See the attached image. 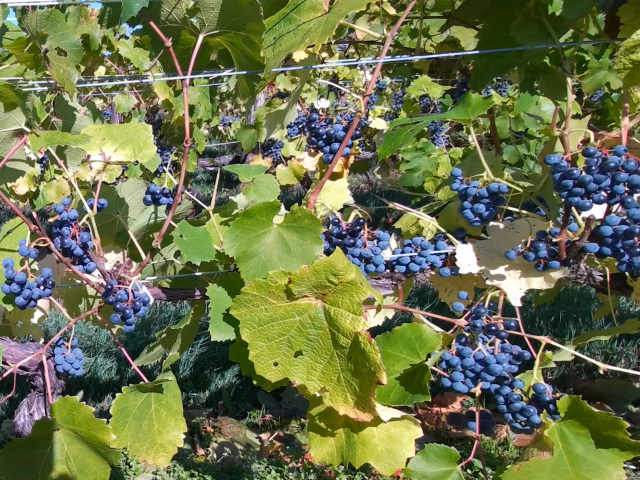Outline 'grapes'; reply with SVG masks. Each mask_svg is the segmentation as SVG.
<instances>
[{
	"mask_svg": "<svg viewBox=\"0 0 640 480\" xmlns=\"http://www.w3.org/2000/svg\"><path fill=\"white\" fill-rule=\"evenodd\" d=\"M479 433L489 438L495 436V431L492 429L495 426V421L491 413L481 411L479 413Z\"/></svg>",
	"mask_w": 640,
	"mask_h": 480,
	"instance_id": "dcf779d0",
	"label": "grapes"
},
{
	"mask_svg": "<svg viewBox=\"0 0 640 480\" xmlns=\"http://www.w3.org/2000/svg\"><path fill=\"white\" fill-rule=\"evenodd\" d=\"M71 204L72 200L69 197H64L59 201V204L53 206L54 211L60 214V218H56L49 225V230L53 233V245L58 251L64 249L68 257L79 258L74 266L81 273L91 275L97 270V264L87 256L86 250H92L94 243L91 241L88 227H84L79 233L78 240L80 243H76L74 239H71L70 234L73 226L78 224L77 217L79 216L77 208H70L65 211L66 205L70 206Z\"/></svg>",
	"mask_w": 640,
	"mask_h": 480,
	"instance_id": "f8a65327",
	"label": "grapes"
},
{
	"mask_svg": "<svg viewBox=\"0 0 640 480\" xmlns=\"http://www.w3.org/2000/svg\"><path fill=\"white\" fill-rule=\"evenodd\" d=\"M449 422L454 425H466L472 432L477 430V417L474 410L467 411L465 414L453 412L449 415Z\"/></svg>",
	"mask_w": 640,
	"mask_h": 480,
	"instance_id": "91a60905",
	"label": "grapes"
},
{
	"mask_svg": "<svg viewBox=\"0 0 640 480\" xmlns=\"http://www.w3.org/2000/svg\"><path fill=\"white\" fill-rule=\"evenodd\" d=\"M449 174L454 178L450 189L459 194L458 200L463 203L458 208L463 219L472 228L489 225L499 213L497 206L507 202V197L502 194H508L510 187L505 183H491L487 189H480L478 181L464 183L463 170L459 167L452 168Z\"/></svg>",
	"mask_w": 640,
	"mask_h": 480,
	"instance_id": "84f90ec7",
	"label": "grapes"
},
{
	"mask_svg": "<svg viewBox=\"0 0 640 480\" xmlns=\"http://www.w3.org/2000/svg\"><path fill=\"white\" fill-rule=\"evenodd\" d=\"M366 224L364 217L357 218L352 224L341 223L335 213L331 215L328 212L323 214V228L328 230L322 232L324 254L331 256L337 248L344 251L346 256L355 267H359L365 277L370 274H381L388 269V263L383 258L382 250L389 248L390 233L388 231L378 230L374 233V238L367 242L361 239L364 233L361 231Z\"/></svg>",
	"mask_w": 640,
	"mask_h": 480,
	"instance_id": "0513c4c2",
	"label": "grapes"
},
{
	"mask_svg": "<svg viewBox=\"0 0 640 480\" xmlns=\"http://www.w3.org/2000/svg\"><path fill=\"white\" fill-rule=\"evenodd\" d=\"M549 234L552 237L561 236L560 227H551ZM547 231L538 230L535 233L536 239L530 242V251H523V258L527 263H535L534 269L537 272H548L550 269L559 270L562 267V262L556 258L559 255V249L550 246H558V241H553L549 238Z\"/></svg>",
	"mask_w": 640,
	"mask_h": 480,
	"instance_id": "ef6de9ee",
	"label": "grapes"
},
{
	"mask_svg": "<svg viewBox=\"0 0 640 480\" xmlns=\"http://www.w3.org/2000/svg\"><path fill=\"white\" fill-rule=\"evenodd\" d=\"M4 269V277L10 283L1 285V292L4 295L15 294L14 303L19 310H25L27 307L33 308L39 304L42 297H50L53 293L55 280L51 278L53 270L50 267H43L40 274H37L34 281L28 280L26 273H17L14 268V258L7 256L1 261Z\"/></svg>",
	"mask_w": 640,
	"mask_h": 480,
	"instance_id": "83cd7487",
	"label": "grapes"
},
{
	"mask_svg": "<svg viewBox=\"0 0 640 480\" xmlns=\"http://www.w3.org/2000/svg\"><path fill=\"white\" fill-rule=\"evenodd\" d=\"M178 184H175L171 190L169 187H163L161 184H149L143 193V204L145 206L160 207L172 205L176 197Z\"/></svg>",
	"mask_w": 640,
	"mask_h": 480,
	"instance_id": "54f908b8",
	"label": "grapes"
},
{
	"mask_svg": "<svg viewBox=\"0 0 640 480\" xmlns=\"http://www.w3.org/2000/svg\"><path fill=\"white\" fill-rule=\"evenodd\" d=\"M64 338L60 336L54 344L58 347L54 348L53 357L56 362V372L58 374L68 373L75 377H81L84 374L83 351L79 347H73L70 352L63 344Z\"/></svg>",
	"mask_w": 640,
	"mask_h": 480,
	"instance_id": "1ff8f66d",
	"label": "grapes"
},
{
	"mask_svg": "<svg viewBox=\"0 0 640 480\" xmlns=\"http://www.w3.org/2000/svg\"><path fill=\"white\" fill-rule=\"evenodd\" d=\"M118 285V281L112 278L104 285V293L102 297L106 299L108 305H111V309L115 312L110 315V323L112 325H118L123 321V331L126 334H132L136 329L137 317H144L148 312V307L151 303V297L143 289L142 282H138L139 288L136 284H132L133 291H131V298L133 301L131 304L127 301L129 299V291L127 289L117 290L113 296L111 292L115 290Z\"/></svg>",
	"mask_w": 640,
	"mask_h": 480,
	"instance_id": "e5b3c951",
	"label": "grapes"
},
{
	"mask_svg": "<svg viewBox=\"0 0 640 480\" xmlns=\"http://www.w3.org/2000/svg\"><path fill=\"white\" fill-rule=\"evenodd\" d=\"M435 240L437 244H432L430 241H426L424 236H415L412 239H405L403 241L402 248H395L394 253H403L409 251H420L419 256H411L405 258L389 259V264L400 273L406 274L407 272L415 271L419 272L421 269L429 267L431 270L438 268V275L440 277H449L450 275L458 277L460 275L459 269L454 267L450 269L445 265L444 260L447 255H431L430 250H449L454 247L452 242H446L445 235L437 232L435 234Z\"/></svg>",
	"mask_w": 640,
	"mask_h": 480,
	"instance_id": "5460f4e3",
	"label": "grapes"
},
{
	"mask_svg": "<svg viewBox=\"0 0 640 480\" xmlns=\"http://www.w3.org/2000/svg\"><path fill=\"white\" fill-rule=\"evenodd\" d=\"M628 153L626 145H616L613 155L606 157L594 146H585L581 156L585 159L584 173L580 167H570V160L562 153L545 154L543 163L552 166L553 190L565 204L580 211H589L595 205L620 203L626 217L606 215L589 234L584 245L586 253H595L597 259L612 256L618 260L617 272H628L632 280L640 276V202L634 193H640V162L623 159Z\"/></svg>",
	"mask_w": 640,
	"mask_h": 480,
	"instance_id": "b958b902",
	"label": "grapes"
},
{
	"mask_svg": "<svg viewBox=\"0 0 640 480\" xmlns=\"http://www.w3.org/2000/svg\"><path fill=\"white\" fill-rule=\"evenodd\" d=\"M362 135H363V132L361 130H355L354 131L352 139L350 140L349 144L347 145V147L342 152V157H349L350 156L351 149L353 147V141L354 140H358Z\"/></svg>",
	"mask_w": 640,
	"mask_h": 480,
	"instance_id": "802abce8",
	"label": "grapes"
},
{
	"mask_svg": "<svg viewBox=\"0 0 640 480\" xmlns=\"http://www.w3.org/2000/svg\"><path fill=\"white\" fill-rule=\"evenodd\" d=\"M319 120L320 116L317 113H311L308 116L307 130L310 133L307 135L306 144L321 149L325 153L322 156V162L325 165H330L337 149L346 138L349 127L346 124L336 123L333 128L326 130L318 124Z\"/></svg>",
	"mask_w": 640,
	"mask_h": 480,
	"instance_id": "2adb6a1f",
	"label": "grapes"
},
{
	"mask_svg": "<svg viewBox=\"0 0 640 480\" xmlns=\"http://www.w3.org/2000/svg\"><path fill=\"white\" fill-rule=\"evenodd\" d=\"M498 303L490 301L480 302L470 309L469 326L463 331L470 334L472 330L479 333L474 346L482 350L469 347V339L462 333L455 336V357L448 351L441 355L437 364L442 369H452L449 377L442 376L441 384L451 388L453 392L468 394L470 389L476 388L481 382L483 390L489 389L490 395L496 398L497 411L503 413L509 423L508 429L515 434L534 435L536 430L530 426H540L543 423L540 415L547 411L552 420H559V399L551 394L554 388L548 383H537L532 386L529 405H525L522 396L515 390L526 387L523 379H512L519 372L523 360H530L532 353L524 350L518 344L505 343L510 338L508 330H519L520 324L514 319H504L500 330L496 322L485 323L483 318L489 315V310L496 311Z\"/></svg>",
	"mask_w": 640,
	"mask_h": 480,
	"instance_id": "01657485",
	"label": "grapes"
}]
</instances>
